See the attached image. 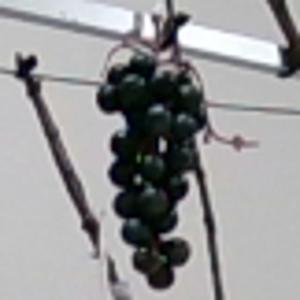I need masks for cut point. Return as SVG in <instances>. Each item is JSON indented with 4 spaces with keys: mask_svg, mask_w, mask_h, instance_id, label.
I'll use <instances>...</instances> for the list:
<instances>
[{
    "mask_svg": "<svg viewBox=\"0 0 300 300\" xmlns=\"http://www.w3.org/2000/svg\"><path fill=\"white\" fill-rule=\"evenodd\" d=\"M165 10L162 1L154 0L153 7L150 9V22L155 30V39L152 49L158 54L161 37V28L164 21Z\"/></svg>",
    "mask_w": 300,
    "mask_h": 300,
    "instance_id": "1",
    "label": "cut point"
}]
</instances>
